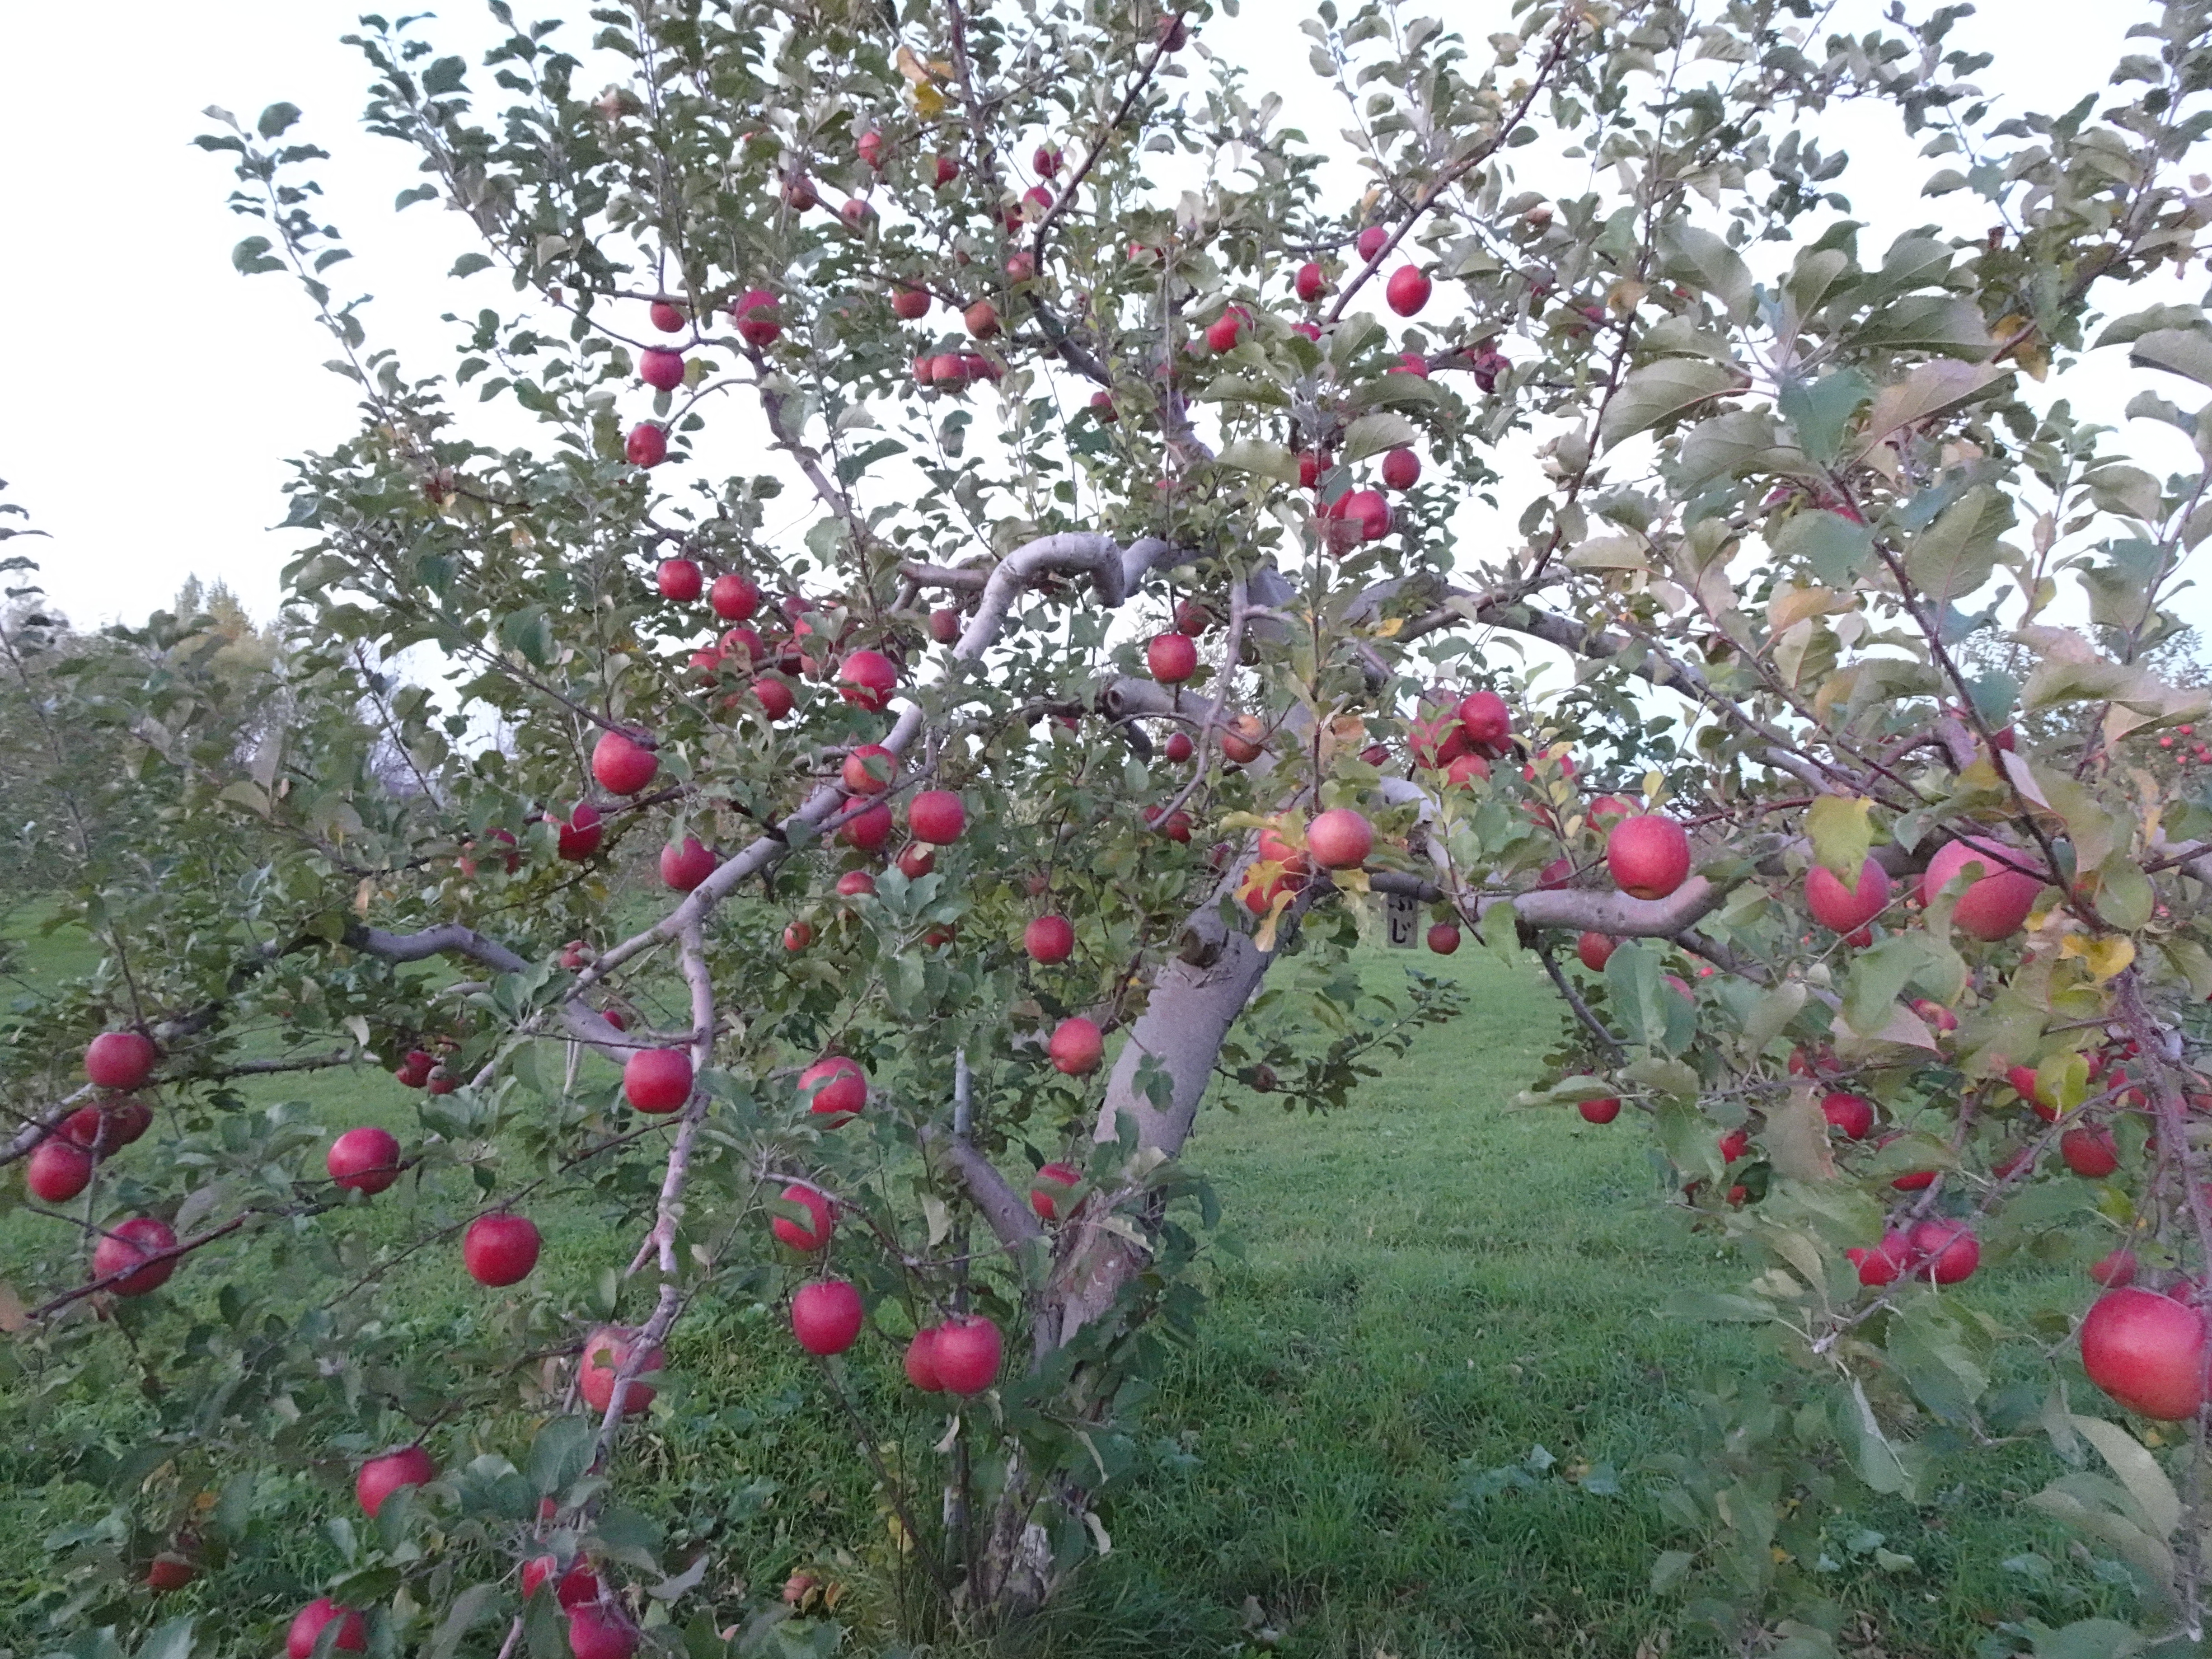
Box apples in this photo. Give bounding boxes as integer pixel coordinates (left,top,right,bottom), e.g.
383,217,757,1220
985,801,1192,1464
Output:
931,1314,1003,1396
933,353,966,391
906,1328,960,1394
736,291,782,346
570,1603,642,1659
719,627,766,670
422,473,458,506
796,1056,869,1131
1803,935,1818,947
1699,964,1716,981
2060,1125,2120,1179
1468,712,1516,765
1029,872,1061,898
2088,1246,2138,1289
327,1128,402,1198
780,176,817,212
1031,1161,1092,1223
1788,1041,1845,1091
1679,1162,1710,1192
442,1024,471,1054
2179,720,2195,737
355,890,396,924
1881,1134,1942,1191
93,1217,179,1298
2008,1054,2057,1100
1565,1062,1595,1095
826,598,849,623
917,913,957,947
1205,304,1254,351
907,790,964,847
1153,479,1184,509
1579,1081,1623,1125
1294,261,1331,303
1468,334,1497,368
1356,742,1394,778
2199,753,2212,768
1049,1016,1104,1076
354,1438,436,1524
1426,920,1462,957
831,621,860,649
1680,943,1703,966
721,690,752,720
1819,1093,1876,1145
924,154,962,190
1766,485,1830,539
395,1049,438,1089
1257,808,1328,881
578,1325,668,1415
2080,1282,2212,1423
1711,1172,1746,1209
521,1535,603,1621
2128,1213,2149,1231
791,1280,864,1357
2100,1064,2151,1116
28,1138,94,1204
45,1121,105,1170
800,646,841,683
1032,142,1065,179
1523,748,1576,798
1208,842,1241,869
1671,283,1705,314
1907,1217,1982,1285
841,651,898,713
1964,968,1999,995
1140,801,1175,833
1585,794,1648,853
804,779,833,809
359,871,400,904
1940,700,2017,779
1089,392,1121,424
2022,946,2047,972
2143,1135,2182,1169
1519,263,1554,304
955,240,985,275
540,797,604,863
1356,226,1393,266
625,424,667,469
1325,523,1362,559
1381,444,1422,491
427,1065,459,1095
2071,1051,2102,1086
896,841,939,882
1243,863,1302,918
1866,1354,1893,1379
1924,834,2043,945
1474,354,1516,395
658,558,703,603
650,296,688,334
2192,740,2207,756
1250,1062,1277,1093
458,824,519,883
1127,973,1153,998
2186,1080,2212,1121
141,1532,203,1593
2161,1093,2192,1125
1151,15,1189,54
837,291,869,323
842,742,898,798
835,871,877,914
1458,692,1508,745
1128,238,1166,275
1024,914,1075,967
1073,293,1098,316
777,636,813,676
964,300,1000,340
1220,713,1267,765
2176,754,2190,767
623,1048,693,1113
1804,849,1891,934
839,796,893,852
570,938,595,961
2165,1275,2207,1320
780,595,818,633
995,198,1026,239
1180,340,1212,373
966,349,996,379
1006,252,1043,289
1173,597,1210,637
782,1576,821,1610
1608,815,1693,902
1347,490,1392,541
771,1179,841,1252
1990,1143,2036,1183
929,608,961,644
659,831,716,893
639,345,685,392
2032,1086,2076,1128
602,1008,630,1034
1314,484,1356,533
2115,1041,2151,1067
1566,294,1606,341
892,278,932,319
285,1595,378,1659
1519,800,1555,838
466,1214,540,1286
110,1097,154,1144
1708,1127,1749,1166
591,722,660,796
794,611,832,657
1577,924,1632,971
2191,1181,2212,1222
1718,359,1754,397
859,126,903,173
1384,352,1430,393
1539,860,1593,904
1147,635,1198,684
1153,363,1182,393
1167,815,1197,842
1433,408,1462,436
1408,712,1467,770
1306,808,1372,872
87,1034,156,1090
534,1493,565,1522
1277,323,1327,364
1022,186,1055,222
744,681,795,724
1165,731,1193,764
711,577,758,621
1415,689,1463,733
685,647,726,689
72,1100,125,1157
1386,264,1433,319
910,352,945,386
840,198,873,239
2157,735,2176,751
1998,315,2036,348
1293,448,1337,492
1646,974,1696,1025
784,921,822,955
1846,1227,1916,1290
745,127,773,152
1903,991,1963,1051
1835,915,1874,955
1907,869,1948,911
1049,715,1081,740
1447,753,1491,801
563,949,590,974
1825,505,1873,549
